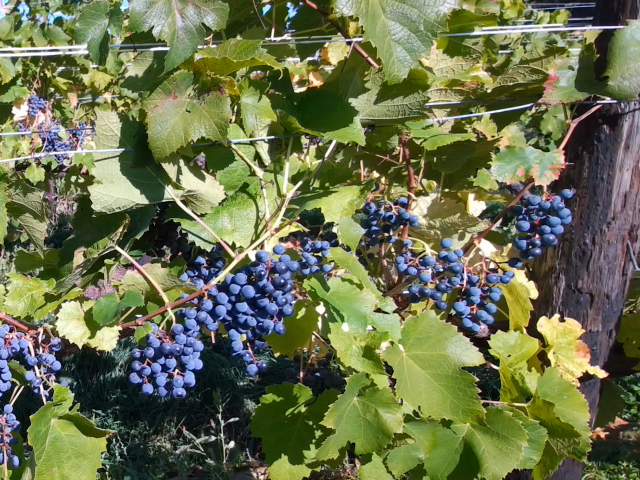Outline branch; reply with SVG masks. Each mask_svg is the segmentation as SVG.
<instances>
[{
    "label": "branch",
    "instance_id": "30e6481e",
    "mask_svg": "<svg viewBox=\"0 0 640 480\" xmlns=\"http://www.w3.org/2000/svg\"><path fill=\"white\" fill-rule=\"evenodd\" d=\"M306 180V177L304 175H301L299 177V179H297L290 187L289 189L285 192L284 195V199H283V203L282 206L280 208V210L278 211V214L276 216V219L271 223V225L265 229L262 234H260L259 236H257L251 243H249L245 248H243L239 254L234 258L233 262L230 263L229 265L225 266L218 274H216L213 278V280L211 282L206 283L205 285L201 286L200 288L191 291L189 293H187L186 295H183L173 301H170L168 303H164L161 304L159 306H156L155 308H152L149 312L136 317L134 319H132L131 321H129L128 323H123L121 325V328L123 330H130L131 328L135 327L136 325H139L141 323H144L145 321L153 318L155 315L166 311V310H170L172 308H175L179 305H182L185 302H188L189 300H192L193 298H196L198 296H201L202 294H204L205 292L209 291L210 289H212L213 287H216L219 282L232 270H234L235 268H237L241 262V260L247 255L249 254L255 247H257L259 245V243H261L262 241H264L278 226L279 224L283 221V218L285 216V213L287 212L289 205H290V201H291V197L292 194L303 184V182Z\"/></svg>",
    "mask_w": 640,
    "mask_h": 480
},
{
    "label": "branch",
    "instance_id": "325d2c04",
    "mask_svg": "<svg viewBox=\"0 0 640 480\" xmlns=\"http://www.w3.org/2000/svg\"><path fill=\"white\" fill-rule=\"evenodd\" d=\"M535 185L533 180H530L526 186L522 187L518 190L499 210L496 212L493 217H491L484 226L472 237H470L465 244L462 246L464 251H468L472 245L478 242L487 232L488 230L510 209V207L518 201L522 196L528 193Z\"/></svg>",
    "mask_w": 640,
    "mask_h": 480
},
{
    "label": "branch",
    "instance_id": "170604dd",
    "mask_svg": "<svg viewBox=\"0 0 640 480\" xmlns=\"http://www.w3.org/2000/svg\"><path fill=\"white\" fill-rule=\"evenodd\" d=\"M399 137H400L399 153L402 159L404 169L406 170L407 194L409 196L408 201L406 202V208L408 210H411L413 208V201L415 200L413 167L410 164L409 157L406 151L407 135L404 132H401L399 134Z\"/></svg>",
    "mask_w": 640,
    "mask_h": 480
},
{
    "label": "branch",
    "instance_id": "45aa463d",
    "mask_svg": "<svg viewBox=\"0 0 640 480\" xmlns=\"http://www.w3.org/2000/svg\"><path fill=\"white\" fill-rule=\"evenodd\" d=\"M603 107V104H596L593 107L589 108L588 110H585L583 113H581L575 120L574 122H572L566 129H565V133L562 137V139L560 140V143L558 144V149L560 151H563L565 149V146L567 145V142L569 141V139L571 138L572 135V131H574L577 127H579L581 125V123L586 120L588 117L592 116L593 114L597 113L601 108Z\"/></svg>",
    "mask_w": 640,
    "mask_h": 480
},
{
    "label": "branch",
    "instance_id": "982ccf7c",
    "mask_svg": "<svg viewBox=\"0 0 640 480\" xmlns=\"http://www.w3.org/2000/svg\"><path fill=\"white\" fill-rule=\"evenodd\" d=\"M403 279H404V274L402 272H399L396 278V281L399 284L385 294V297L387 299L392 298L393 296L398 294L401 290L406 289L408 286L413 285L417 281V278L415 276H411L410 278L402 282Z\"/></svg>",
    "mask_w": 640,
    "mask_h": 480
},
{
    "label": "branch",
    "instance_id": "1ff4a987",
    "mask_svg": "<svg viewBox=\"0 0 640 480\" xmlns=\"http://www.w3.org/2000/svg\"><path fill=\"white\" fill-rule=\"evenodd\" d=\"M0 319L5 323H8L10 325L19 327L21 330H23L29 336L37 337L39 335V332L37 330L31 329L27 324H25L24 322H22L19 319H15V318H12L10 316H7L4 312H0Z\"/></svg>",
    "mask_w": 640,
    "mask_h": 480
},
{
    "label": "branch",
    "instance_id": "ea751061",
    "mask_svg": "<svg viewBox=\"0 0 640 480\" xmlns=\"http://www.w3.org/2000/svg\"><path fill=\"white\" fill-rule=\"evenodd\" d=\"M352 48L359 54H361L368 62L370 66L378 67L379 63L377 60L360 44L353 43Z\"/></svg>",
    "mask_w": 640,
    "mask_h": 480
},
{
    "label": "branch",
    "instance_id": "ca6c30ca",
    "mask_svg": "<svg viewBox=\"0 0 640 480\" xmlns=\"http://www.w3.org/2000/svg\"><path fill=\"white\" fill-rule=\"evenodd\" d=\"M332 24H333V25H334V27L337 29V32H338L340 35H346V34H347V31H346V30H343V29H342V27L339 25V23H338L336 20H333V21H332ZM345 39H346V40H349V39H350V36H349V35H346V36H345Z\"/></svg>",
    "mask_w": 640,
    "mask_h": 480
}]
</instances>
